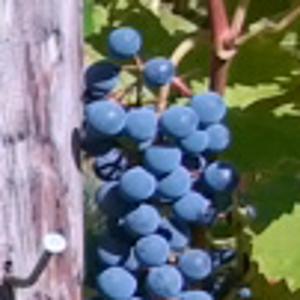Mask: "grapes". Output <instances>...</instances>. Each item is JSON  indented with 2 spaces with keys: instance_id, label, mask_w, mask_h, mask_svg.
Wrapping results in <instances>:
<instances>
[{
  "instance_id": "0513c4c2",
  "label": "grapes",
  "mask_w": 300,
  "mask_h": 300,
  "mask_svg": "<svg viewBox=\"0 0 300 300\" xmlns=\"http://www.w3.org/2000/svg\"><path fill=\"white\" fill-rule=\"evenodd\" d=\"M176 64L169 57H154L142 68V78L151 87L169 85L175 78Z\"/></svg>"
},
{
  "instance_id": "01657485",
  "label": "grapes",
  "mask_w": 300,
  "mask_h": 300,
  "mask_svg": "<svg viewBox=\"0 0 300 300\" xmlns=\"http://www.w3.org/2000/svg\"><path fill=\"white\" fill-rule=\"evenodd\" d=\"M119 79L111 59L92 63L82 74L79 149L101 181L93 203L105 214L120 215L123 240L97 242L106 269L95 278V292L102 300H217L212 290L190 286L207 283L233 259V250L189 248L192 229H208L220 218L208 190L228 193L239 183L233 163L208 158L231 146L230 102L200 91L186 106L159 115L107 98Z\"/></svg>"
},
{
  "instance_id": "b958b902",
  "label": "grapes",
  "mask_w": 300,
  "mask_h": 300,
  "mask_svg": "<svg viewBox=\"0 0 300 300\" xmlns=\"http://www.w3.org/2000/svg\"><path fill=\"white\" fill-rule=\"evenodd\" d=\"M143 45V37L134 26L116 28L106 36V47L116 61H128L137 57Z\"/></svg>"
}]
</instances>
